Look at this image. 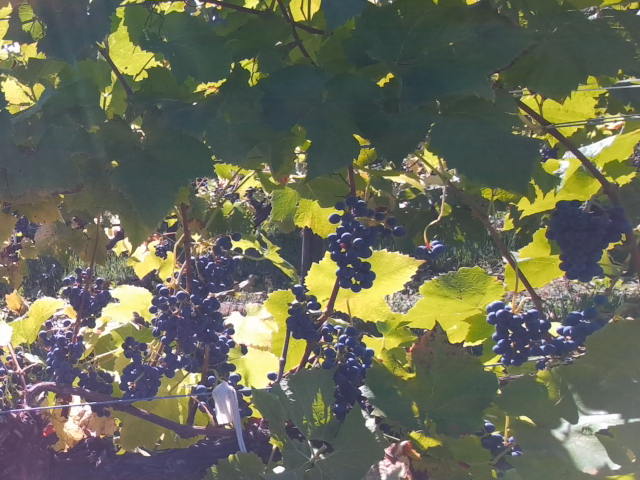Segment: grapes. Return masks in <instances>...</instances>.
<instances>
[{
  "label": "grapes",
  "mask_w": 640,
  "mask_h": 480,
  "mask_svg": "<svg viewBox=\"0 0 640 480\" xmlns=\"http://www.w3.org/2000/svg\"><path fill=\"white\" fill-rule=\"evenodd\" d=\"M232 248L229 236L221 237L213 246V252L198 258L199 269L207 276L206 284H199L197 279L191 280V295L179 291L175 296L169 294L164 284H158L156 291L163 297H154L149 307L151 314L160 317L151 319L153 337H159L161 331L166 334L161 337L164 356L158 358L159 366L141 365V353L147 349L145 342H138L132 336L123 338L122 351L126 359H131L132 365L123 368L120 374V389L124 398H145L159 393L160 376L167 378L175 376V369L185 367L188 373H195L202 366V354L206 348L211 350L209 367L219 373H234L236 366L227 363L229 356L226 351L235 346L232 338L233 328L225 329L222 324L220 301L215 297H205L209 293H219L222 283L225 287L234 284L232 265L234 259L228 257L225 251ZM179 340L183 345L184 356L178 359L170 345L172 340Z\"/></svg>",
  "instance_id": "obj_1"
},
{
  "label": "grapes",
  "mask_w": 640,
  "mask_h": 480,
  "mask_svg": "<svg viewBox=\"0 0 640 480\" xmlns=\"http://www.w3.org/2000/svg\"><path fill=\"white\" fill-rule=\"evenodd\" d=\"M487 324L495 326L493 352L501 355L503 366L520 368L530 355L561 354L575 351L592 332L605 326L603 319L586 325L579 320H591L597 316L595 307L574 310L563 318V326L557 328L556 339H543L542 333L551 329V323L538 317L537 309L526 314L513 311L510 304L494 301L486 306Z\"/></svg>",
  "instance_id": "obj_2"
},
{
  "label": "grapes",
  "mask_w": 640,
  "mask_h": 480,
  "mask_svg": "<svg viewBox=\"0 0 640 480\" xmlns=\"http://www.w3.org/2000/svg\"><path fill=\"white\" fill-rule=\"evenodd\" d=\"M578 199L559 201L554 210V221L546 231L548 239L557 238L561 260L559 269L566 271L570 280L588 283L603 274L602 249L610 242H620L622 234L632 231L625 206L608 211L584 212Z\"/></svg>",
  "instance_id": "obj_3"
},
{
  "label": "grapes",
  "mask_w": 640,
  "mask_h": 480,
  "mask_svg": "<svg viewBox=\"0 0 640 480\" xmlns=\"http://www.w3.org/2000/svg\"><path fill=\"white\" fill-rule=\"evenodd\" d=\"M292 293L296 299L293 301V307L289 309L287 328L292 331L295 340L332 343L334 336H339L334 350H324L326 358L323 360V368L332 370L337 360L336 352L343 353V359L347 362L340 363L334 372V381L338 384L334 389L336 404L333 406V412L338 420H344L346 413L361 398V389L358 386L366 378V368L372 366L375 351L372 347H366L364 342H357V330L354 327L343 329L341 324L327 322L322 328H317V324L307 316V310H319L321 303L316 301L314 295H306L303 284H295Z\"/></svg>",
  "instance_id": "obj_4"
},
{
  "label": "grapes",
  "mask_w": 640,
  "mask_h": 480,
  "mask_svg": "<svg viewBox=\"0 0 640 480\" xmlns=\"http://www.w3.org/2000/svg\"><path fill=\"white\" fill-rule=\"evenodd\" d=\"M347 207H353L351 212H346L342 216L333 213L328 216L331 224H337L341 221V226L336 228V234L327 236L328 250L331 252V259L336 262L338 270L336 276L338 282L343 289H350L353 293H360L363 290H369L374 285L375 273L370 270L371 263L369 261H361L360 258H370L373 250L368 244H374L378 236L403 237L405 229L399 224L396 216H388L383 211H375L369 209L367 202L358 197H348L343 202H337L335 209L343 211ZM358 218H373L377 222H383L384 225L365 226L361 224Z\"/></svg>",
  "instance_id": "obj_5"
},
{
  "label": "grapes",
  "mask_w": 640,
  "mask_h": 480,
  "mask_svg": "<svg viewBox=\"0 0 640 480\" xmlns=\"http://www.w3.org/2000/svg\"><path fill=\"white\" fill-rule=\"evenodd\" d=\"M70 325L71 321L69 319L63 322L65 328ZM72 333V328H68L66 331L60 330L58 334L53 335L50 339H48L46 332L40 334L43 345L51 348L47 353L46 363L48 366L45 368V372L49 377H52L54 373L64 384H72L75 381V377H79L80 380L76 382V385L80 389H88L105 396H111L113 389L110 383L113 381V377L109 373L102 370L97 371L92 366L87 368L88 372L86 373L81 372L79 368H75L78 358L83 356L84 346L82 342L84 338L79 336L75 343H69L72 339Z\"/></svg>",
  "instance_id": "obj_6"
},
{
  "label": "grapes",
  "mask_w": 640,
  "mask_h": 480,
  "mask_svg": "<svg viewBox=\"0 0 640 480\" xmlns=\"http://www.w3.org/2000/svg\"><path fill=\"white\" fill-rule=\"evenodd\" d=\"M63 296L69 298V302L74 311L79 309L80 300H85V307L82 313L84 319L81 321V324L88 329H94L96 327V320L90 316L93 314L96 318H100L102 316V309L107 307L111 301V295L108 290H103L99 292L97 296L93 297L89 292L81 293L79 287H73L66 288L63 291Z\"/></svg>",
  "instance_id": "obj_7"
},
{
  "label": "grapes",
  "mask_w": 640,
  "mask_h": 480,
  "mask_svg": "<svg viewBox=\"0 0 640 480\" xmlns=\"http://www.w3.org/2000/svg\"><path fill=\"white\" fill-rule=\"evenodd\" d=\"M228 381L231 386H234L235 393L238 395V405H239V414L241 417L250 416L252 414V409L249 406V403L243 400V395L250 396L251 391L246 388L243 384H238L241 381V376L239 374H230L228 376Z\"/></svg>",
  "instance_id": "obj_8"
},
{
  "label": "grapes",
  "mask_w": 640,
  "mask_h": 480,
  "mask_svg": "<svg viewBox=\"0 0 640 480\" xmlns=\"http://www.w3.org/2000/svg\"><path fill=\"white\" fill-rule=\"evenodd\" d=\"M445 252V243L438 238L431 240V248L425 245H419L415 248V254L418 257H437Z\"/></svg>",
  "instance_id": "obj_9"
},
{
  "label": "grapes",
  "mask_w": 640,
  "mask_h": 480,
  "mask_svg": "<svg viewBox=\"0 0 640 480\" xmlns=\"http://www.w3.org/2000/svg\"><path fill=\"white\" fill-rule=\"evenodd\" d=\"M503 441L504 436L502 434L487 435L481 439V445L485 448H491V454L498 456L500 452L506 449V444Z\"/></svg>",
  "instance_id": "obj_10"
},
{
  "label": "grapes",
  "mask_w": 640,
  "mask_h": 480,
  "mask_svg": "<svg viewBox=\"0 0 640 480\" xmlns=\"http://www.w3.org/2000/svg\"><path fill=\"white\" fill-rule=\"evenodd\" d=\"M200 401L196 403V407L201 413H207L208 410L212 416L217 415L215 401L212 396L198 398Z\"/></svg>",
  "instance_id": "obj_11"
},
{
  "label": "grapes",
  "mask_w": 640,
  "mask_h": 480,
  "mask_svg": "<svg viewBox=\"0 0 640 480\" xmlns=\"http://www.w3.org/2000/svg\"><path fill=\"white\" fill-rule=\"evenodd\" d=\"M215 383H216V379L214 378V374L209 373L206 380H204L202 383H198L196 387L192 388V391L194 393L206 392L211 388V385H214Z\"/></svg>",
  "instance_id": "obj_12"
},
{
  "label": "grapes",
  "mask_w": 640,
  "mask_h": 480,
  "mask_svg": "<svg viewBox=\"0 0 640 480\" xmlns=\"http://www.w3.org/2000/svg\"><path fill=\"white\" fill-rule=\"evenodd\" d=\"M92 272V269H90L89 267H87L86 269L82 270L81 268H76L74 270V273L76 275H81L83 274L84 276H87L88 274H90Z\"/></svg>",
  "instance_id": "obj_13"
}]
</instances>
